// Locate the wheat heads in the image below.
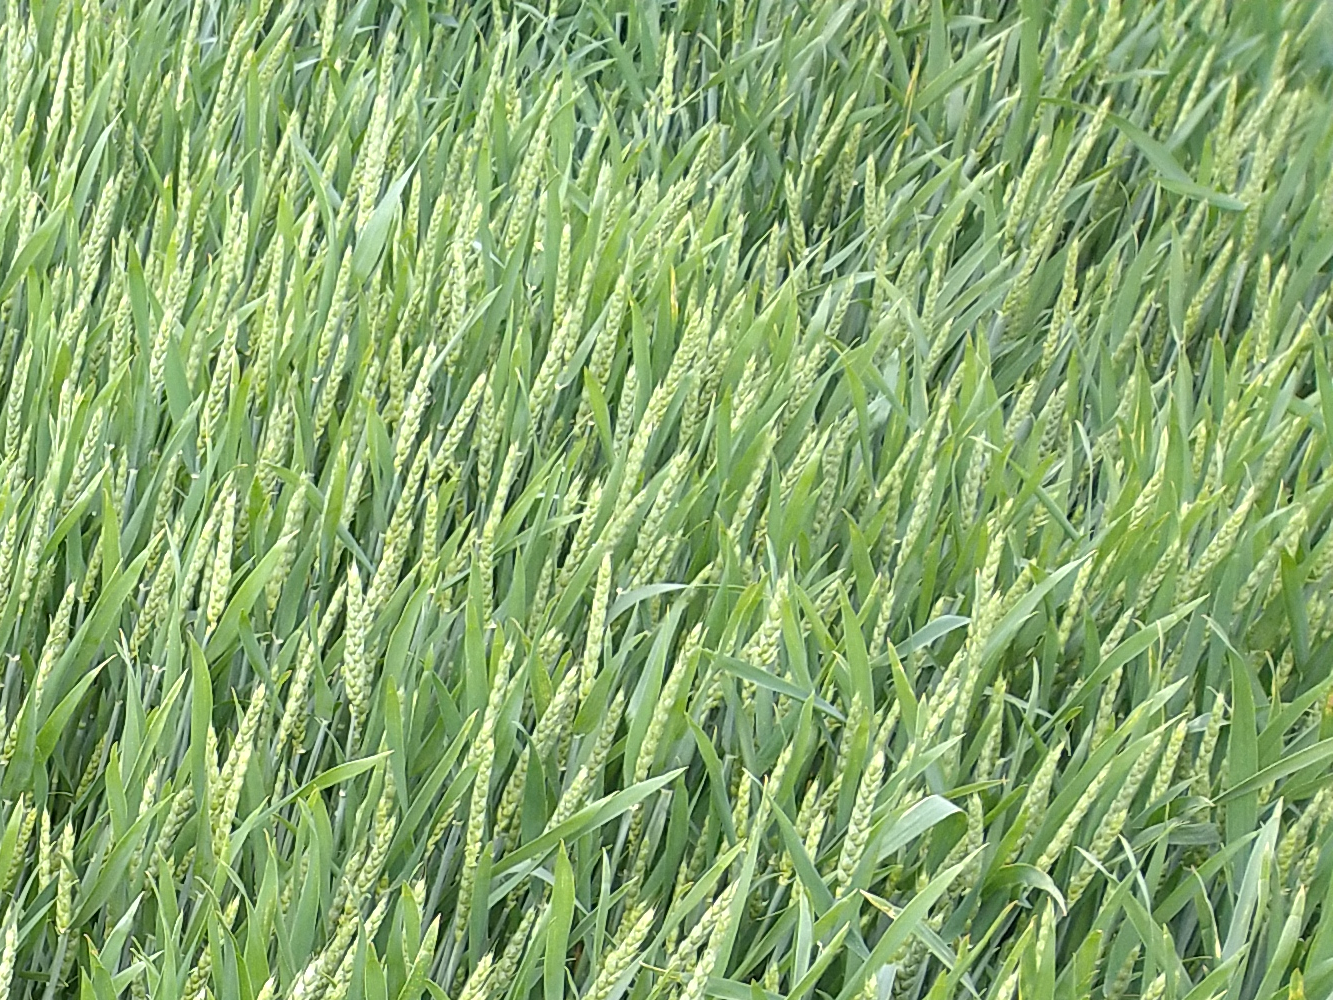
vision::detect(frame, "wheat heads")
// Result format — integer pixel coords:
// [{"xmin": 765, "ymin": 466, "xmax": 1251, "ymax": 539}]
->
[
  {"xmin": 1223, "ymin": 256, "xmax": 1248, "ymax": 328},
  {"xmin": 535, "ymin": 183, "xmax": 555, "ymax": 257},
  {"xmin": 144, "ymin": 179, "xmax": 169, "ymax": 283},
  {"xmin": 206, "ymin": 725, "xmax": 215, "ymax": 819},
  {"xmin": 809, "ymin": 432, "xmax": 839, "ymax": 529},
  {"xmin": 670, "ymin": 566, "xmax": 714, "ymax": 604},
  {"xmin": 1185, "ymin": 241, "xmax": 1234, "ymax": 338},
  {"xmin": 180, "ymin": 0, "xmax": 201, "ymax": 72},
  {"xmin": 195, "ymin": 535, "xmax": 221, "ymax": 615},
  {"xmin": 0, "ymin": 125, "xmax": 17, "ymax": 216},
  {"xmin": 1259, "ymin": 272, "xmax": 1288, "ymax": 362},
  {"xmin": 112, "ymin": 307, "xmax": 132, "ymax": 374},
  {"xmin": 1047, "ymin": 35, "xmax": 1085, "ymax": 96},
  {"xmin": 49, "ymin": 51, "xmax": 68, "ymax": 124},
  {"xmin": 681, "ymin": 327, "xmax": 729, "ymax": 437},
  {"xmin": 329, "ymin": 845, "xmax": 367, "ymax": 926},
  {"xmin": 1057, "ymin": 236, "xmax": 1081, "ymax": 338},
  {"xmin": 804, "ymin": 583, "xmax": 849, "ymax": 636},
  {"xmin": 875, "ymin": 937, "xmax": 932, "ymax": 1000},
  {"xmin": 320, "ymin": 246, "xmax": 353, "ymax": 367},
  {"xmin": 180, "ymin": 128, "xmax": 189, "ymax": 213},
  {"xmin": 917, "ymin": 321, "xmax": 952, "ymax": 377},
  {"xmin": 251, "ymin": 402, "xmax": 293, "ymax": 489},
  {"xmin": 959, "ymin": 795, "xmax": 982, "ymax": 889},
  {"xmin": 632, "ymin": 537, "xmax": 666, "ymax": 583},
  {"xmin": 1057, "ymin": 557, "xmax": 1094, "ymax": 647},
  {"xmin": 1148, "ymin": 73, "xmax": 1182, "ymax": 128},
  {"xmin": 245, "ymin": 30, "xmax": 289, "ymax": 94},
  {"xmin": 402, "ymin": 924, "xmax": 409, "ymax": 973},
  {"xmin": 429, "ymin": 372, "xmax": 485, "ymax": 481},
  {"xmin": 51, "ymin": 821, "xmax": 77, "ymax": 933},
  {"xmin": 477, "ymin": 384, "xmax": 500, "ymax": 484},
  {"xmin": 1097, "ymin": 609, "xmax": 1130, "ymax": 661},
  {"xmin": 565, "ymin": 257, "xmax": 596, "ymax": 355},
  {"xmin": 150, "ymin": 311, "xmax": 176, "ymax": 388},
  {"xmin": 180, "ymin": 947, "xmax": 212, "ymax": 1000},
  {"xmin": 640, "ymin": 452, "xmax": 698, "ymax": 560},
  {"xmin": 183, "ymin": 289, "xmax": 211, "ymax": 390},
  {"xmin": 383, "ymin": 351, "xmax": 421, "ymax": 411},
  {"xmin": 243, "ymin": 235, "xmax": 282, "ymax": 304},
  {"xmin": 969, "ymin": 532, "xmax": 1003, "ymax": 638},
  {"xmin": 210, "ymin": 734, "xmax": 254, "ymax": 860},
  {"xmin": 132, "ymin": 760, "xmax": 162, "ymax": 876},
  {"xmin": 301, "ymin": 85, "xmax": 324, "ymax": 149},
  {"xmin": 172, "ymin": 494, "xmax": 226, "ymax": 612},
  {"xmin": 454, "ymin": 739, "xmax": 491, "ymax": 935},
  {"xmin": 1269, "ymin": 633, "xmax": 1292, "ymax": 692},
  {"xmin": 660, "ymin": 37, "xmax": 677, "ymax": 102},
  {"xmin": 51, "ymin": 1, "xmax": 69, "ymax": 83},
  {"xmin": 732, "ymin": 365, "xmax": 767, "ymax": 424},
  {"xmin": 200, "ymin": 318, "xmax": 238, "ymax": 432},
  {"xmin": 244, "ymin": 236, "xmax": 299, "ymax": 407},
  {"xmin": 627, "ymin": 913, "xmax": 731, "ymax": 1000},
  {"xmin": 393, "ymin": 345, "xmax": 432, "ymax": 468},
  {"xmin": 633, "ymin": 177, "xmax": 660, "ymax": 216},
  {"xmin": 552, "ymin": 476, "xmax": 578, "ymax": 543},
  {"xmin": 390, "ymin": 333, "xmax": 402, "ymax": 406},
  {"xmin": 974, "ymin": 103, "xmax": 1004, "ymax": 146},
  {"xmin": 1021, "ymin": 743, "xmax": 1063, "ymax": 822},
  {"xmin": 1116, "ymin": 294, "xmax": 1157, "ymax": 367},
  {"xmin": 273, "ymin": 632, "xmax": 310, "ymax": 750},
  {"xmin": 203, "ymin": 897, "xmax": 241, "ymax": 969},
  {"xmin": 268, "ymin": 484, "xmax": 310, "ymax": 605},
  {"xmin": 253, "ymin": 976, "xmax": 273, "ymax": 1000},
  {"xmin": 567, "ymin": 479, "xmax": 601, "ymax": 557},
  {"xmin": 351, "ymin": 628, "xmax": 383, "ymax": 725},
  {"xmin": 564, "ymin": 916, "xmax": 654, "ymax": 1000},
  {"xmin": 867, "ymin": 590, "xmax": 894, "ymax": 655},
  {"xmin": 0, "ymin": 915, "xmax": 18, "ymax": 1000},
  {"xmin": 1241, "ymin": 134, "xmax": 1265, "ymax": 241},
  {"xmin": 612, "ymin": 367, "xmax": 643, "ymax": 463},
  {"xmin": 151, "ymin": 792, "xmax": 200, "ymax": 882},
  {"xmin": 869, "ymin": 703, "xmax": 904, "ymax": 754},
  {"xmin": 124, "ymin": 120, "xmax": 135, "ymax": 173},
  {"xmin": 897, "ymin": 472, "xmax": 939, "ymax": 570},
  {"xmin": 777, "ymin": 344, "xmax": 830, "ymax": 432},
  {"xmin": 891, "ymin": 649, "xmax": 964, "ymax": 776},
  {"xmin": 834, "ymin": 749, "xmax": 886, "ymax": 894},
  {"xmin": 1181, "ymin": 48, "xmax": 1215, "ymax": 125},
  {"xmin": 313, "ymin": 330, "xmax": 345, "ymax": 445},
  {"xmin": 729, "ymin": 773, "xmax": 750, "ymax": 838},
  {"xmin": 0, "ymin": 510, "xmax": 19, "ymax": 605},
  {"xmin": 321, "ymin": 0, "xmax": 335, "ymax": 53},
  {"xmin": 211, "ymin": 244, "xmax": 238, "ymax": 330},
  {"xmin": 236, "ymin": 918, "xmax": 360, "ymax": 1000},
  {"xmin": 815, "ymin": 146, "xmax": 854, "ymax": 225},
  {"xmin": 495, "ymin": 666, "xmax": 576, "ymax": 826},
  {"xmin": 821, "ymin": 92, "xmax": 854, "ymax": 163},
  {"xmin": 1191, "ymin": 695, "xmax": 1221, "ymax": 776},
  {"xmin": 347, "ymin": 358, "xmax": 380, "ymax": 445},
  {"xmin": 140, "ymin": 73, "xmax": 173, "ymax": 163},
  {"xmin": 78, "ymin": 177, "xmax": 122, "ymax": 286},
  {"xmin": 21, "ymin": 489, "xmax": 51, "ymax": 600},
  {"xmin": 79, "ymin": 736, "xmax": 108, "ymax": 795},
  {"xmin": 725, "ymin": 351, "xmax": 756, "ymax": 412},
  {"xmin": 781, "ymin": 426, "xmax": 815, "ymax": 494},
  {"xmin": 988, "ymin": 30, "xmax": 1008, "ymax": 105},
  {"xmin": 1000, "ymin": 376, "xmax": 1039, "ymax": 437},
  {"xmin": 522, "ymin": 631, "xmax": 565, "ymax": 681},
  {"xmin": 548, "ymin": 693, "xmax": 627, "ymax": 837},
  {"xmin": 1151, "ymin": 634, "xmax": 1197, "ymax": 693},
  {"xmin": 1149, "ymin": 719, "xmax": 1190, "ymax": 802},
  {"xmin": 129, "ymin": 70, "xmax": 152, "ymax": 112},
  {"xmin": 234, "ymin": 210, "xmax": 249, "ymax": 284},
  {"xmin": 959, "ymin": 434, "xmax": 989, "ymax": 528},
  {"xmin": 16, "ymin": 195, "xmax": 39, "ymax": 252},
  {"xmin": 822, "ymin": 278, "xmax": 854, "ymax": 358},
  {"xmin": 407, "ymin": 194, "xmax": 445, "ymax": 310},
  {"xmin": 1268, "ymin": 91, "xmax": 1298, "ymax": 167},
  {"xmin": 760, "ymin": 222, "xmax": 783, "ymax": 307},
  {"xmin": 917, "ymin": 268, "xmax": 941, "ymax": 328},
  {"xmin": 806, "ymin": 809, "xmax": 828, "ymax": 864},
  {"xmin": 38, "ymin": 809, "xmax": 51, "ymax": 892},
  {"xmin": 659, "ymin": 311, "xmax": 704, "ymax": 413},
  {"xmin": 781, "ymin": 166, "xmax": 803, "ymax": 255},
  {"xmin": 207, "ymin": 687, "xmax": 266, "ymax": 798},
  {"xmin": 265, "ymin": 111, "xmax": 300, "ymax": 200},
  {"xmin": 6, "ymin": 1, "xmax": 16, "ymax": 100},
  {"xmin": 833, "ymin": 693, "xmax": 859, "ymax": 783},
  {"xmin": 573, "ymin": 556, "xmax": 612, "ymax": 682},
  {"xmin": 921, "ymin": 366, "xmax": 967, "ymax": 468},
  {"xmin": 442, "ymin": 135, "xmax": 459, "ymax": 199},
  {"xmin": 449, "ymin": 247, "xmax": 465, "ymax": 330},
  {"xmin": 308, "ymin": 581, "xmax": 346, "ymax": 656},
  {"xmin": 920, "ymin": 595, "xmax": 950, "ymax": 621},
  {"xmin": 607, "ymin": 180, "xmax": 639, "ymax": 221},
  {"xmin": 689, "ymin": 131, "xmax": 718, "ymax": 184},
  {"xmin": 1248, "ymin": 421, "xmax": 1298, "ymax": 496},
  {"xmin": 404, "ymin": 164, "xmax": 421, "ymax": 245},
  {"xmin": 1039, "ymin": 97, "xmax": 1111, "ymax": 229},
  {"xmin": 1232, "ymin": 323, "xmax": 1262, "ymax": 362},
  {"xmin": 803, "ymin": 89, "xmax": 832, "ymax": 160},
  {"xmin": 878, "ymin": 429, "xmax": 919, "ymax": 496},
  {"xmin": 718, "ymin": 213, "xmax": 742, "ymax": 302},
  {"xmin": 1177, "ymin": 488, "xmax": 1254, "ymax": 588},
  {"xmin": 574, "ymin": 273, "xmax": 627, "ymax": 417},
  {"xmin": 173, "ymin": 249, "xmax": 196, "ymax": 315},
  {"xmin": 132, "ymin": 959, "xmax": 148, "ymax": 1000},
  {"xmin": 342, "ymin": 118, "xmax": 372, "ymax": 211},
  {"xmin": 389, "ymin": 438, "xmax": 430, "ymax": 533},
  {"xmin": 61, "ymin": 411, "xmax": 107, "ymax": 512},
  {"xmin": 489, "ymin": 907, "xmax": 533, "ymax": 1000},
  {"xmin": 358, "ymin": 103, "xmax": 389, "ymax": 225},
  {"xmin": 476, "ymin": 539, "xmax": 496, "ymax": 625},
  {"xmin": 875, "ymin": 194, "xmax": 889, "ymax": 228},
  {"xmin": 781, "ymin": 783, "xmax": 819, "ymax": 872},
  {"xmin": 762, "ymin": 589, "xmax": 784, "ymax": 695},
  {"xmin": 870, "ymin": 240, "xmax": 889, "ymax": 328},
  {"xmin": 72, "ymin": 28, "xmax": 88, "ymax": 120},
  {"xmin": 510, "ymin": 91, "xmax": 560, "ymax": 247},
  {"xmin": 864, "ymin": 156, "xmax": 877, "ymax": 230},
  {"xmin": 629, "ymin": 841, "xmax": 649, "ymax": 905},
  {"xmin": 1041, "ymin": 382, "xmax": 1071, "ymax": 450},
  {"xmin": 1179, "ymin": 200, "xmax": 1205, "ymax": 245},
  {"xmin": 658, "ymin": 884, "xmax": 738, "ymax": 990},
  {"xmin": 68, "ymin": 319, "xmax": 99, "ymax": 390},
  {"xmin": 635, "ymin": 180, "xmax": 700, "ymax": 269},
  {"xmin": 79, "ymin": 456, "xmax": 133, "ymax": 595},
  {"xmin": 51, "ymin": 266, "xmax": 69, "ymax": 318},
  {"xmin": 57, "ymin": 930, "xmax": 79, "ymax": 987},
  {"xmin": 472, "ymin": 639, "xmax": 516, "ymax": 758},
  {"xmin": 555, "ymin": 225, "xmax": 570, "ymax": 311},
  {"xmin": 169, "ymin": 207, "xmax": 189, "ymax": 262},
  {"xmin": 709, "ymin": 625, "xmax": 776, "ymax": 706},
  {"xmin": 808, "ymin": 236, "xmax": 830, "ymax": 279},
  {"xmin": 61, "ymin": 278, "xmax": 99, "ymax": 334},
  {"xmin": 442, "ymin": 981, "xmax": 494, "ymax": 1000},
  {"xmin": 1096, "ymin": 947, "xmax": 1138, "ymax": 1000},
  {"xmin": 204, "ymin": 500, "xmax": 257, "ymax": 622},
  {"xmin": 1028, "ymin": 766, "xmax": 1108, "ymax": 871},
  {"xmin": 999, "ymin": 228, "xmax": 1050, "ymax": 309},
  {"xmin": 725, "ymin": 452, "xmax": 764, "ymax": 535},
  {"xmin": 1133, "ymin": 539, "xmax": 1179, "ymax": 604},
  {"xmin": 1037, "ymin": 291, "xmax": 1068, "ymax": 369},
  {"xmin": 130, "ymin": 553, "xmax": 173, "ymax": 643},
  {"xmin": 1205, "ymin": 405, "xmax": 1234, "ymax": 493},
  {"xmin": 605, "ymin": 900, "xmax": 646, "ymax": 961},
  {"xmin": 526, "ymin": 560, "xmax": 556, "ymax": 636},
  {"xmin": 423, "ymin": 493, "xmax": 438, "ymax": 566},
  {"xmin": 490, "ymin": 0, "xmax": 505, "ymax": 41},
  {"xmin": 770, "ymin": 74, "xmax": 786, "ymax": 139},
  {"xmin": 1273, "ymin": 783, "xmax": 1326, "ymax": 869},
  {"xmin": 932, "ymin": 239, "xmax": 948, "ymax": 272},
  {"xmin": 1296, "ymin": 834, "xmax": 1329, "ymax": 877},
  {"xmin": 624, "ymin": 621, "xmax": 701, "ymax": 827},
  {"xmin": 522, "ymin": 312, "xmax": 562, "ymax": 423},
  {"xmin": 1129, "ymin": 466, "xmax": 1166, "ymax": 522},
  {"xmin": 224, "ymin": 183, "xmax": 244, "ymax": 247},
  {"xmin": 1096, "ymin": 666, "xmax": 1122, "ymax": 712},
  {"xmin": 1187, "ymin": 422, "xmax": 1210, "ymax": 479},
  {"xmin": 368, "ymin": 517, "xmax": 415, "ymax": 601},
  {"xmin": 8, "ymin": 346, "xmax": 34, "ymax": 462},
  {"xmin": 1252, "ymin": 251, "xmax": 1271, "ymax": 344},
  {"xmin": 1216, "ymin": 77, "xmax": 1282, "ymax": 180},
  {"xmin": 455, "ymin": 131, "xmax": 476, "ymax": 189},
  {"xmin": 372, "ymin": 757, "xmax": 399, "ymax": 830},
  {"xmin": 340, "ymin": 562, "xmax": 367, "ymax": 711},
  {"xmin": 616, "ymin": 379, "xmax": 659, "ymax": 511},
  {"xmin": 980, "ymin": 683, "xmax": 1008, "ymax": 784},
  {"xmin": 139, "ymin": 454, "xmax": 182, "ymax": 577},
  {"xmin": 452, "ymin": 188, "xmax": 467, "ymax": 251},
  {"xmin": 278, "ymin": 897, "xmax": 389, "ymax": 1000},
  {"xmin": 394, "ymin": 64, "xmax": 425, "ymax": 128},
  {"xmin": 1072, "ymin": 738, "xmax": 1160, "ymax": 883},
  {"xmin": 210, "ymin": 46, "xmax": 239, "ymax": 135},
  {"xmin": 811, "ymin": 777, "xmax": 843, "ymax": 819},
  {"xmin": 751, "ymin": 743, "xmax": 794, "ymax": 833},
  {"xmin": 346, "ymin": 816, "xmax": 397, "ymax": 914},
  {"xmin": 104, "ymin": 58, "xmax": 124, "ymax": 122},
  {"xmin": 196, "ymin": 195, "xmax": 211, "ymax": 245},
  {"xmin": 969, "ymin": 599, "xmax": 1004, "ymax": 676},
  {"xmin": 880, "ymin": 478, "xmax": 900, "ymax": 560},
  {"xmin": 683, "ymin": 271, "xmax": 700, "ymax": 318},
  {"xmin": 894, "ymin": 250, "xmax": 921, "ymax": 283},
  {"xmin": 0, "ymin": 808, "xmax": 36, "ymax": 976},
  {"xmin": 1009, "ymin": 133, "xmax": 1049, "ymax": 241},
  {"xmin": 1237, "ymin": 516, "xmax": 1304, "ymax": 610},
  {"xmin": 688, "ymin": 821, "xmax": 712, "ymax": 883},
  {"xmin": 475, "ymin": 37, "xmax": 512, "ymax": 152},
  {"xmin": 0, "ymin": 583, "xmax": 75, "ymax": 742},
  {"xmin": 579, "ymin": 95, "xmax": 615, "ymax": 180},
  {"xmin": 433, "ymin": 953, "xmax": 495, "ymax": 1000},
  {"xmin": 941, "ymin": 672, "xmax": 980, "ymax": 776},
  {"xmin": 1209, "ymin": 75, "xmax": 1236, "ymax": 167},
  {"xmin": 377, "ymin": 31, "xmax": 394, "ymax": 107},
  {"xmin": 17, "ymin": 423, "xmax": 35, "ymax": 493}
]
